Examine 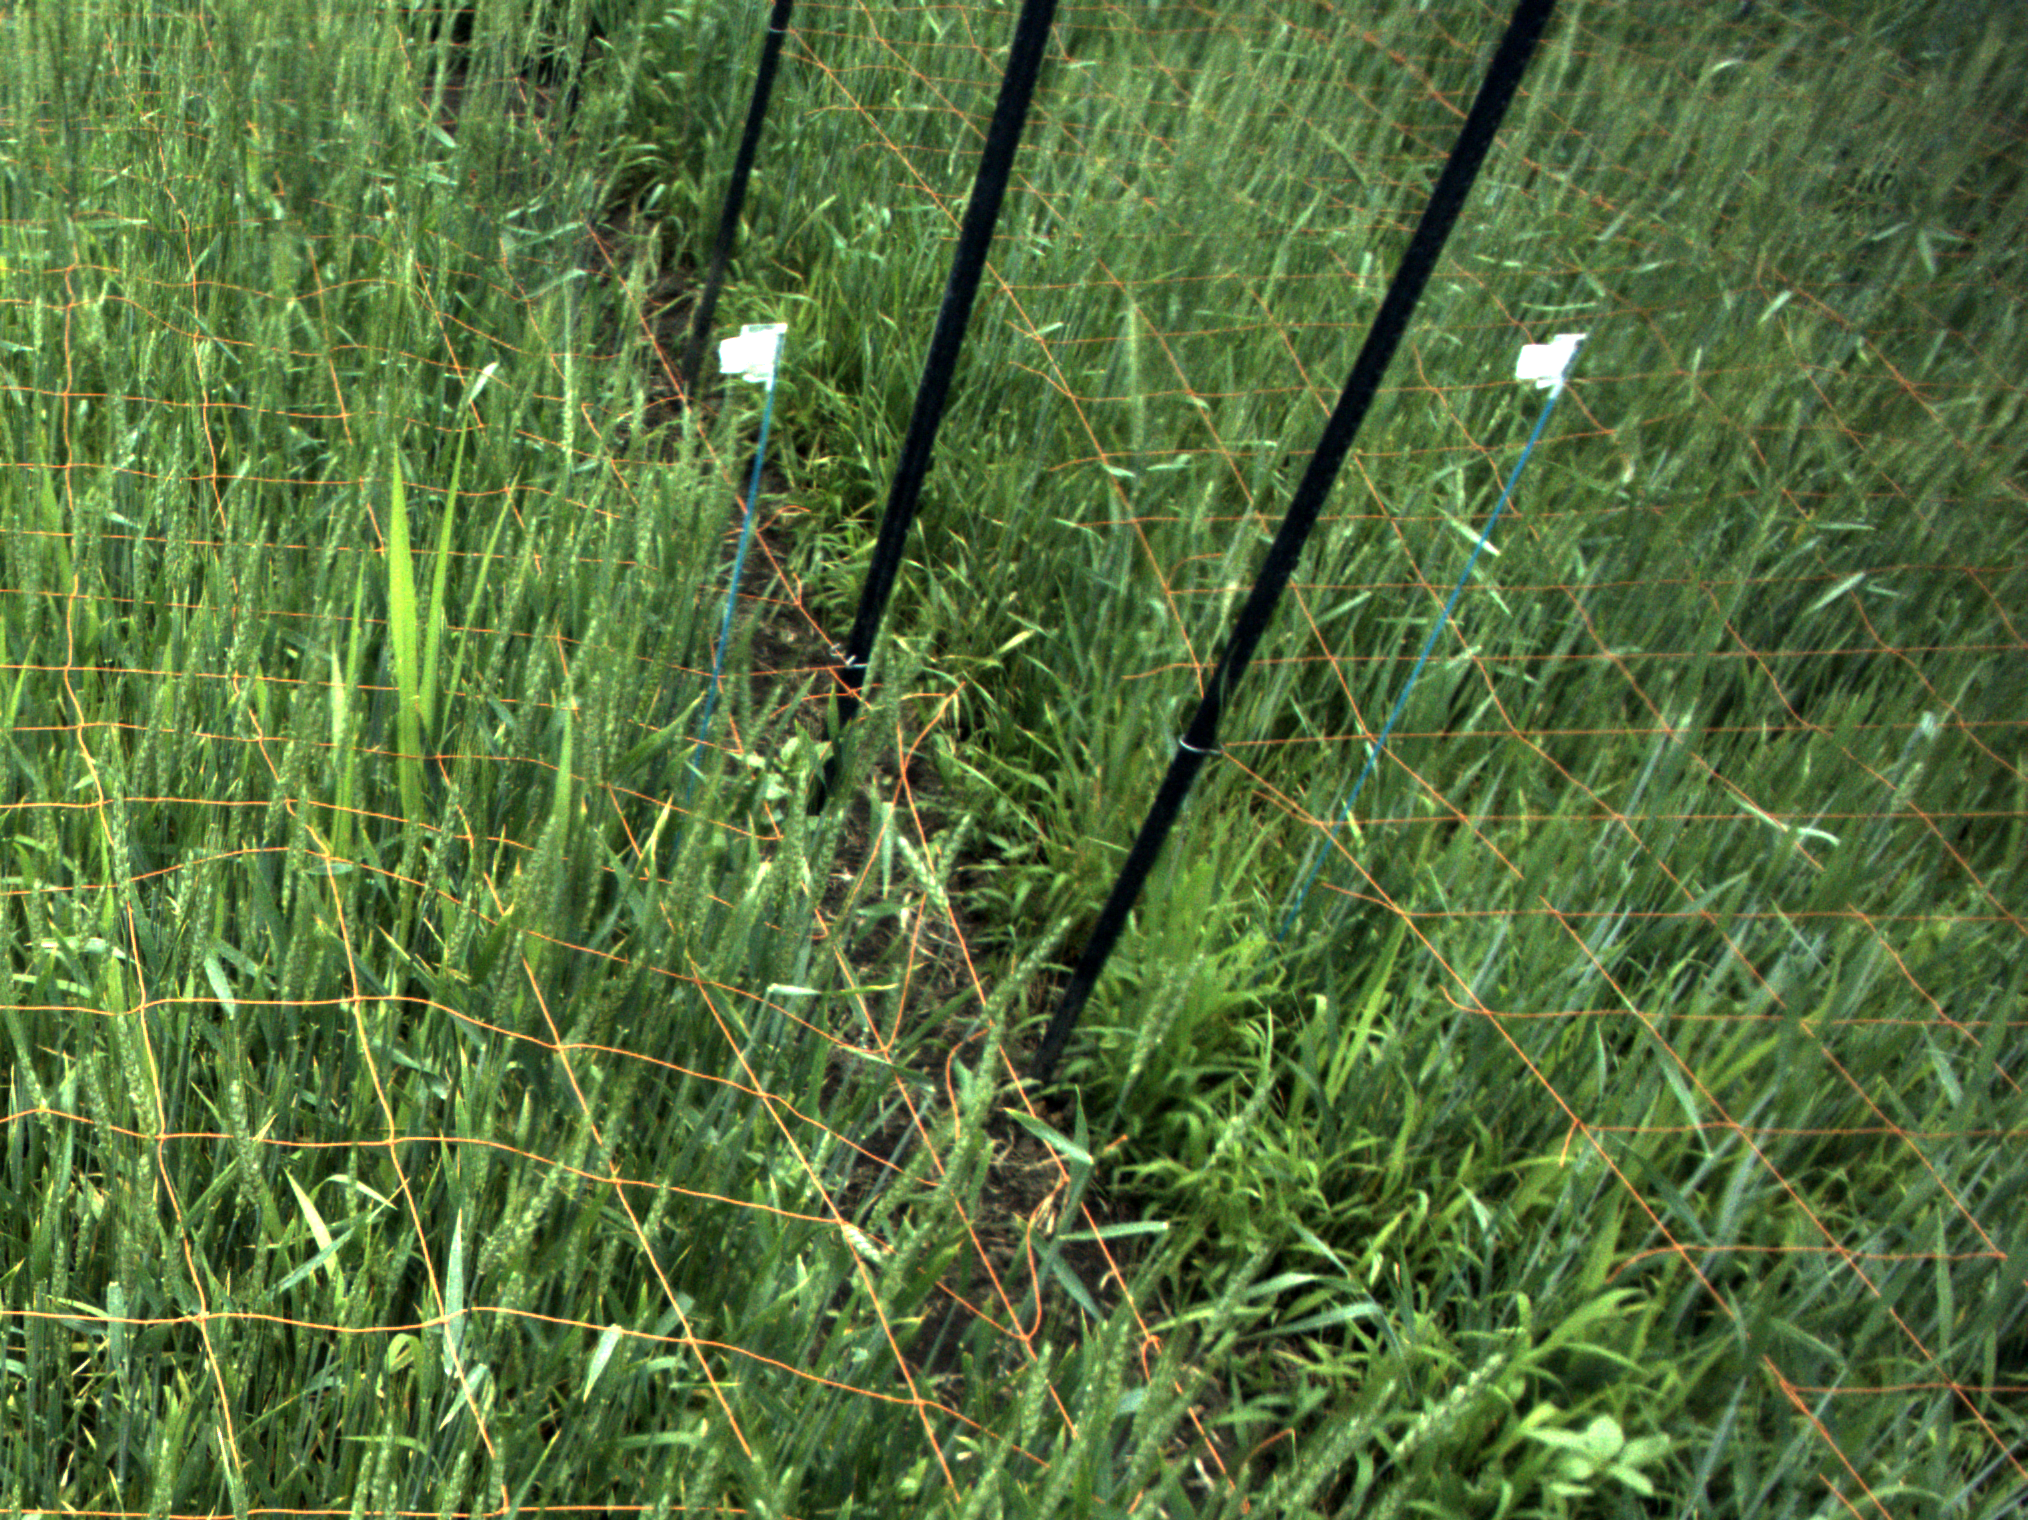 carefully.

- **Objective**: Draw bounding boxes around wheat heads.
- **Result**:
[76,885,107,951]
[1917,459,1956,505]
[1903,415,1948,464]
[75,1212,93,1274]
[617,264,639,326]
[490,1272,526,1333]
[421,783,465,903]
[395,813,424,898]
[234,485,251,570]
[1506,132,1532,182]
[295,872,310,929]
[664,636,689,696]
[1035,1440,1090,1520]
[0,415,18,461]
[408,22,434,83]
[562,833,581,874]
[365,222,396,273]
[0,722,18,800]
[71,855,85,931]
[238,1005,257,1058]
[323,500,351,571]
[118,1225,139,1300]
[161,1225,185,1299]
[276,314,293,377]
[115,1012,159,1139]
[24,541,43,633]
[352,753,371,830]
[171,648,200,749]
[342,63,358,129]
[154,732,171,809]
[860,614,888,700]
[145,420,159,466]
[1486,393,1510,434]
[1287,1372,1399,1515]
[1075,1360,1107,1443]
[515,149,533,200]
[594,341,630,458]
[522,615,545,690]
[369,1422,395,1506]
[341,887,360,948]
[424,1314,439,1366]
[840,1222,882,1263]
[1519,465,1542,505]
[639,1179,672,1242]
[955,1425,1014,1520]
[231,643,262,740]
[14,1040,59,1135]
[684,856,715,928]
[189,982,207,1053]
[578,818,609,936]
[710,887,746,972]
[14,97,35,195]
[7,1481,29,1520]
[226,1075,269,1208]
[524,21,541,58]
[564,25,587,96]
[478,580,523,700]
[925,1130,978,1220]
[138,1471,173,1520]
[262,738,295,841]
[491,432,516,480]
[470,22,485,54]
[346,1451,374,1520]
[51,1240,69,1308]
[194,193,210,233]
[401,247,415,291]
[1221,579,1238,623]
[1393,1354,1505,1463]
[293,784,310,872]
[574,86,609,177]
[368,54,393,128]
[378,437,397,545]
[226,779,244,844]
[1019,1338,1054,1440]
[709,672,737,750]
[1092,1322,1131,1444]
[330,56,349,115]
[724,412,738,474]
[246,1232,269,1311]
[86,454,116,552]
[170,422,183,508]
[682,1446,720,1520]
[1524,68,1549,130]
[423,552,437,585]
[884,645,905,727]
[902,635,931,692]
[144,329,159,388]
[475,1220,517,1276]
[469,788,492,887]
[7,288,25,327]
[786,765,811,888]
[520,863,553,929]
[781,926,837,1057]
[157,1434,174,1520]
[153,458,166,529]
[618,1306,653,1369]
[553,27,564,67]
[176,29,189,117]
[1134,395,1146,448]
[92,727,112,792]
[674,402,701,475]
[224,20,249,76]
[1276,58,1296,100]
[1239,525,1253,577]
[176,862,223,983]
[935,813,970,883]
[279,930,309,1001]
[680,459,695,529]
[1222,108,1246,161]
[501,526,513,574]
[232,1472,250,1520]
[1335,1473,1419,1520]
[131,546,149,615]
[1156,957,1205,1044]
[192,1206,215,1267]
[427,56,448,125]
[280,836,295,910]
[39,807,60,869]
[444,886,474,967]
[394,362,422,439]
[399,290,430,351]
[175,493,190,566]
[1212,1078,1276,1163]
[743,684,782,757]
[971,1003,1008,1095]
[523,95,536,138]
[476,121,498,199]
[16,20,37,92]
[651,936,674,1032]
[87,33,116,103]
[1855,430,1881,473]
[1233,40,1251,84]
[697,453,719,531]
[661,792,713,918]
[312,356,329,406]
[355,446,378,530]
[1559,11,1581,69]
[560,616,599,695]
[22,1303,36,1376]
[166,292,182,329]
[1193,478,1216,532]
[434,1449,470,1520]
[344,1150,359,1218]
[883,1220,934,1284]
[69,510,88,576]
[231,63,252,139]
[159,47,173,111]
[344,1269,363,1320]
[515,1155,537,1204]
[490,924,509,994]
[63,751,78,804]
[667,458,685,527]
[30,875,45,970]
[561,389,576,453]
[7,133,35,204]
[177,551,196,594]
[358,357,379,399]
[223,499,237,590]
[162,510,180,591]
[1705,509,1727,558]
[223,590,255,679]
[801,805,846,918]
[517,516,538,578]
[120,279,135,327]
[546,506,568,588]
[375,251,393,299]
[980,1433,1010,1520]
[78,1051,115,1155]
[45,1156,63,1222]
[739,662,751,738]
[299,949,334,1013]
[291,699,323,776]
[594,1052,651,1183]
[0,900,11,1003]
[858,965,904,1096]
[298,1270,316,1310]
[595,1238,621,1296]
[568,1348,582,1394]
[1453,464,1466,512]
[344,437,356,480]
[470,56,486,111]
[44,22,62,63]
[761,850,796,913]
[1120,74,1146,127]
[456,368,477,422]
[803,1262,829,1335]
[1083,113,1108,167]
[462,549,475,604]
[135,1153,156,1253]
[181,707,199,771]
[32,289,44,357]
[627,390,647,440]
[516,367,540,419]
[1199,1242,1273,1354]
[380,1480,400,1520]
[89,304,108,360]
[0,943,15,991]
[671,1321,691,1371]
[414,584,432,685]
[510,1326,529,1382]
[624,626,672,741]
[62,74,86,139]
[238,898,254,956]
[313,456,338,499]
[531,1345,549,1390]
[1966,420,1998,473]
[373,1242,392,1313]
[427,293,451,351]
[86,536,105,612]
[219,589,235,642]
[194,420,211,454]
[510,548,521,582]
[1910,434,1951,481]
[604,506,636,586]
[754,1497,803,1520]
[506,658,549,762]
[566,494,603,578]
[513,815,555,903]
[13,515,27,578]
[235,1158,266,1211]
[1496,125,1521,174]
[112,787,134,899]
[259,134,279,184]
[604,653,621,751]
[489,21,504,74]
[636,509,660,568]
[383,333,402,432]
[564,1112,594,1195]
[190,881,215,980]
[259,316,280,355]
[349,1286,369,1343]
[800,1128,833,1208]
[589,946,646,1047]
[1393,443,1412,510]
[471,435,492,485]
[558,989,600,1066]
[238,945,251,998]
[1782,398,1802,449]
[607,678,635,777]
[329,166,363,274]
[583,667,606,791]
[1568,71,1591,130]
[500,24,516,106]
[364,1504,387,1520]
[693,1493,722,1520]
[435,238,451,304]
[1222,1464,1255,1520]
[487,1434,505,1510]
[383,586,398,684]
[733,1473,770,1520]
[229,1324,259,1394]
[133,690,169,792]
[315,1283,338,1336]
[579,306,594,348]
[592,92,625,184]
[107,388,132,454]
[1128,1385,1202,1483]
[562,1228,583,1284]
[231,133,249,195]
[388,97,416,157]
[490,930,523,1023]
[503,353,533,414]
[1963,397,1986,447]
[865,1150,924,1225]
[496,1162,565,1269]
[1132,966,1182,1066]
[1131,1344,1184,1439]
[984,914,1072,1016]
[119,230,133,284]
[471,1113,494,1186]
[199,97,235,181]
[553,535,573,592]
[1888,756,1929,815]
[1256,1416,1354,1513]
[1856,219,1921,322]
[274,516,291,588]
[254,180,288,218]
[239,295,261,375]
[1325,18,1345,66]
[524,881,569,1030]
[356,394,371,444]
[172,848,196,930]
[131,44,142,95]
[902,1503,946,1520]
[79,301,95,343]
[612,34,644,111]
[53,1320,75,1392]
[454,145,475,200]
[758,1464,795,1520]
[241,519,267,586]
[334,673,360,782]
[470,1491,487,1520]
[300,598,334,699]
[636,471,654,543]
[1291,75,1313,117]
[100,915,116,977]
[895,833,952,916]
[375,714,393,784]
[123,52,137,109]
[646,1492,674,1520]
[36,23,59,97]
